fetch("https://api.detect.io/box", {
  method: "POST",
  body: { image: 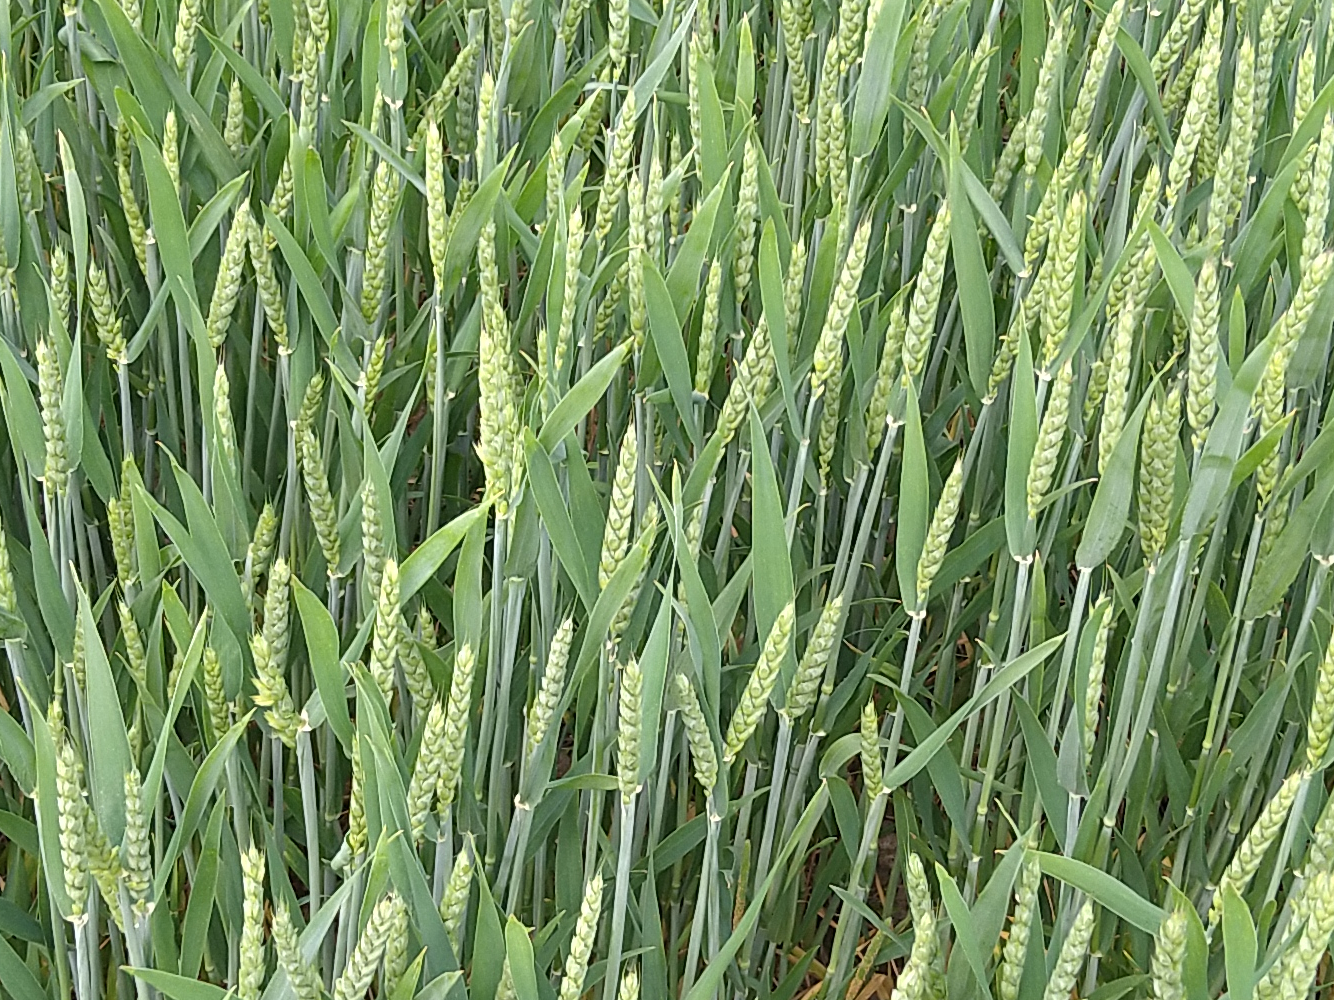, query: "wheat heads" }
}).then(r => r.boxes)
[695,260,724,395]
[203,645,229,748]
[410,52,480,139]
[1166,44,1224,199]
[1296,48,1317,132]
[1023,134,1090,260]
[424,125,448,292]
[957,35,991,152]
[1250,488,1293,581]
[868,301,910,449]
[907,854,930,935]
[591,260,637,354]
[160,114,179,201]
[299,371,325,449]
[677,676,715,791]
[1204,146,1236,245]
[209,197,256,343]
[15,133,31,214]
[450,181,476,232]
[371,560,400,708]
[1242,259,1334,429]
[272,912,335,1000]
[86,263,124,354]
[117,598,145,686]
[1138,384,1190,558]
[440,844,475,962]
[724,601,798,758]
[422,323,436,410]
[1189,87,1216,186]
[626,658,645,792]
[861,702,883,800]
[412,607,441,651]
[983,238,1056,398]
[618,502,662,635]
[1020,34,1066,172]
[556,875,603,1000]
[1154,909,1188,1000]
[1257,4,1276,131]
[623,178,645,253]
[510,0,556,37]
[528,616,572,747]
[778,0,804,113]
[989,121,1031,198]
[1102,244,1155,335]
[250,229,287,342]
[211,368,238,482]
[486,0,508,73]
[1262,875,1334,1000]
[1096,308,1137,469]
[645,159,661,249]
[267,150,303,228]
[347,744,368,877]
[1020,359,1074,514]
[35,336,66,488]
[250,505,280,581]
[240,845,266,1000]
[126,769,156,901]
[814,371,842,469]
[368,86,386,164]
[605,0,631,59]
[227,79,246,150]
[48,702,60,750]
[118,469,144,525]
[79,807,123,926]
[575,82,607,149]
[815,220,869,380]
[0,494,17,609]
[869,916,935,1000]
[1250,890,1316,1000]
[380,894,409,991]
[279,0,312,62]
[669,133,681,242]
[838,0,874,62]
[473,335,509,496]
[1223,43,1256,219]
[480,229,506,347]
[596,91,635,238]
[408,702,447,836]
[902,7,941,144]
[1271,0,1311,35]
[393,629,438,735]
[112,0,140,34]
[169,646,187,710]
[75,598,88,688]
[118,166,146,263]
[105,494,138,592]
[508,429,529,496]
[547,138,567,233]
[1207,0,1224,53]
[536,327,550,410]
[332,901,394,1000]
[1185,261,1218,429]
[1308,616,1334,751]
[1079,601,1112,760]
[57,747,91,913]
[563,0,589,50]
[359,159,393,326]
[1044,901,1097,1000]
[683,497,707,564]
[918,459,969,607]
[906,200,955,372]
[602,426,638,587]
[50,249,70,328]
[1003,851,1041,1000]
[479,72,504,173]
[1086,145,1103,199]
[1068,0,1125,140]
[489,960,521,1000]
[554,208,586,368]
[830,99,849,205]
[250,635,304,736]
[357,339,382,419]
[300,35,314,137]
[1303,117,1334,267]
[300,429,343,558]
[788,595,846,717]
[1087,255,1107,307]
[1305,786,1334,887]
[1143,46,1202,137]
[173,0,205,70]
[816,37,835,184]
[260,563,290,672]
[437,646,477,807]
[1260,367,1288,484]
[386,0,411,66]
[456,59,476,153]
[1158,0,1230,65]
[1034,198,1087,355]
[358,480,387,598]
[867,0,903,43]
[687,0,713,174]
[714,252,801,442]
[725,138,758,288]
[1210,778,1302,920]
[1131,168,1162,237]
